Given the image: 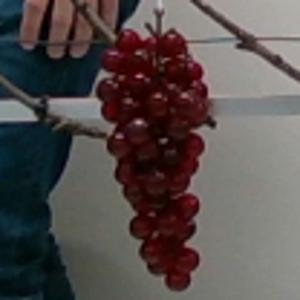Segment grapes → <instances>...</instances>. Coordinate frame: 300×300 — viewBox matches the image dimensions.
Wrapping results in <instances>:
<instances>
[{"label":"grapes","instance_id":"01657485","mask_svg":"<svg viewBox=\"0 0 300 300\" xmlns=\"http://www.w3.org/2000/svg\"><path fill=\"white\" fill-rule=\"evenodd\" d=\"M178 31L162 39L120 31L99 55L109 76L96 88L102 118L117 124L106 141L113 177L135 212L129 235L142 241L140 260L175 294L187 292L201 265L184 242L197 231L198 198L187 192L201 168L204 137L193 131L212 118L203 66Z\"/></svg>","mask_w":300,"mask_h":300}]
</instances>
